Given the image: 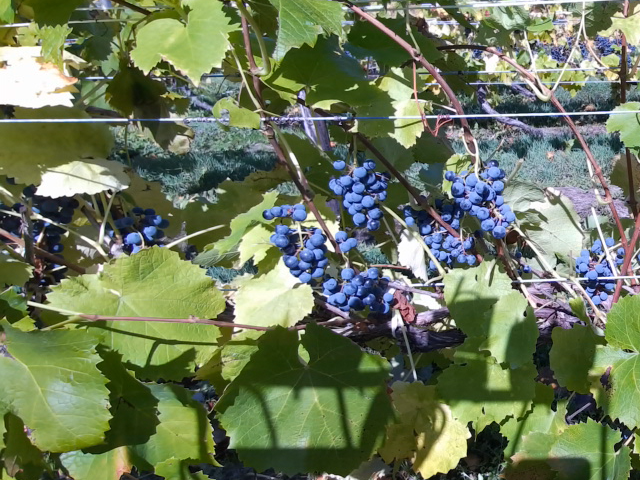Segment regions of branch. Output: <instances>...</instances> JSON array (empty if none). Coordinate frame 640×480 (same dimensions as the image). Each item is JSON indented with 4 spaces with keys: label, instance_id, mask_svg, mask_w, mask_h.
<instances>
[{
    "label": "branch",
    "instance_id": "30e6481e",
    "mask_svg": "<svg viewBox=\"0 0 640 480\" xmlns=\"http://www.w3.org/2000/svg\"><path fill=\"white\" fill-rule=\"evenodd\" d=\"M563 121L572 129L575 136L577 137V140L579 141L581 148L586 155L587 162L590 165V168L593 174L596 176V179L599 185L601 186V188L605 192L606 197L608 198L609 205H610L609 209L612 212L614 219L617 221L619 231H620V236L624 243V252H623L624 263H623V268L620 270V274L633 275L634 269H633L632 259L635 252L636 245L640 238V215L636 217V220L634 222L633 236L630 241L624 219L621 217L620 211L617 209V206H616L615 195L612 193L611 188L608 186V184L606 183L603 177V174L599 170V167L597 166V163L594 160L593 153L590 150L583 133L579 129L578 125L570 117H564Z\"/></svg>",
    "mask_w": 640,
    "mask_h": 480
},
{
    "label": "branch",
    "instance_id": "325d2c04",
    "mask_svg": "<svg viewBox=\"0 0 640 480\" xmlns=\"http://www.w3.org/2000/svg\"><path fill=\"white\" fill-rule=\"evenodd\" d=\"M350 9L361 18L367 20L369 23H371L378 29L385 32L393 41H395L402 48H404L409 54H411L426 69V71L430 73V75L441 84L444 91L449 95L450 99L452 100L457 113H464V108L460 102V99L458 98L454 90L451 88L449 83L446 81V79L443 76H441L432 67V65L419 53L417 49L411 47V45L408 42H406L404 39H402L400 36L394 33L390 27H388L383 22L379 21L378 19L370 15L368 12L360 9L356 4H352L350 6Z\"/></svg>",
    "mask_w": 640,
    "mask_h": 480
},
{
    "label": "branch",
    "instance_id": "170604dd",
    "mask_svg": "<svg viewBox=\"0 0 640 480\" xmlns=\"http://www.w3.org/2000/svg\"><path fill=\"white\" fill-rule=\"evenodd\" d=\"M475 50L479 52L489 53L495 56L502 58L511 68H513L518 73L527 76L531 81H533L544 93L550 98V102L559 110L566 112L565 106L559 102L557 97L553 95V92L548 88V86L542 82L534 73H532L529 69L520 66L516 63L506 52L501 49L494 48L492 46H486L477 43H457V42H447L441 43L436 46V50L438 52L444 50Z\"/></svg>",
    "mask_w": 640,
    "mask_h": 480
},
{
    "label": "branch",
    "instance_id": "45aa463d",
    "mask_svg": "<svg viewBox=\"0 0 640 480\" xmlns=\"http://www.w3.org/2000/svg\"><path fill=\"white\" fill-rule=\"evenodd\" d=\"M264 126L266 128L267 134L269 136V139L274 147V149L276 150V153L278 154V158H279V162L283 168V170L285 171L286 175L288 177H290L293 180V184L296 187V189L299 191V193L306 199L307 205L311 211V215L316 219V221L318 222V225L323 233V235L326 237L327 241L329 243H332V246L334 248V251H337V245L335 243V238L332 235V233L330 232L328 226L325 223L324 218L322 217L321 213L318 211V208L316 207V204L314 202V199L312 197V195L305 189V187L302 185L299 176L294 173L292 171V169L290 168V165L286 159L285 156V152L283 150V147L281 146V144L279 143L276 133L273 129L272 123L270 121H266L264 123Z\"/></svg>",
    "mask_w": 640,
    "mask_h": 480
},
{
    "label": "branch",
    "instance_id": "982ccf7c",
    "mask_svg": "<svg viewBox=\"0 0 640 480\" xmlns=\"http://www.w3.org/2000/svg\"><path fill=\"white\" fill-rule=\"evenodd\" d=\"M353 136L356 137L361 143L364 144V146L369 149L370 151H372L375 156L378 158V160L387 168H389L393 174V176L399 180L400 182H402L411 192L412 194L417 197V199L419 200L420 204L439 222L441 223L447 230L449 233H451L452 235H454L457 238H461L462 234L459 233L458 231H456L448 222H446L439 214L437 211H435L434 209H432V207L425 201V199L423 198L422 194L419 193L416 188L406 179L404 178L402 175H400L397 172L396 167L391 164L390 162H388L383 156L382 154L379 152V150L371 145L361 134H359L358 132H354Z\"/></svg>",
    "mask_w": 640,
    "mask_h": 480
},
{
    "label": "branch",
    "instance_id": "1ff4a987",
    "mask_svg": "<svg viewBox=\"0 0 640 480\" xmlns=\"http://www.w3.org/2000/svg\"><path fill=\"white\" fill-rule=\"evenodd\" d=\"M241 27H242V42L244 45V49H245V55L247 57V60L250 64V68H251V76H252V80H253V89H254V93H255V98L257 101V108L259 111V115L261 117H264L266 115V108L264 106V98L262 95V90L260 87V78H259V73H258V65L256 62V59L253 55L252 52V46H251V42L249 39V25H248V21L246 19H243L241 21Z\"/></svg>",
    "mask_w": 640,
    "mask_h": 480
},
{
    "label": "branch",
    "instance_id": "ea751061",
    "mask_svg": "<svg viewBox=\"0 0 640 480\" xmlns=\"http://www.w3.org/2000/svg\"><path fill=\"white\" fill-rule=\"evenodd\" d=\"M461 124L463 126L466 143L470 149H473L475 147V142L472 137L470 123L466 118H463L461 120Z\"/></svg>",
    "mask_w": 640,
    "mask_h": 480
},
{
    "label": "branch",
    "instance_id": "ca6c30ca",
    "mask_svg": "<svg viewBox=\"0 0 640 480\" xmlns=\"http://www.w3.org/2000/svg\"><path fill=\"white\" fill-rule=\"evenodd\" d=\"M622 286H623V280H617L616 284H615V291L613 293V296L610 300V303L612 305H616L619 301L620 295L622 293Z\"/></svg>",
    "mask_w": 640,
    "mask_h": 480
}]
</instances>
